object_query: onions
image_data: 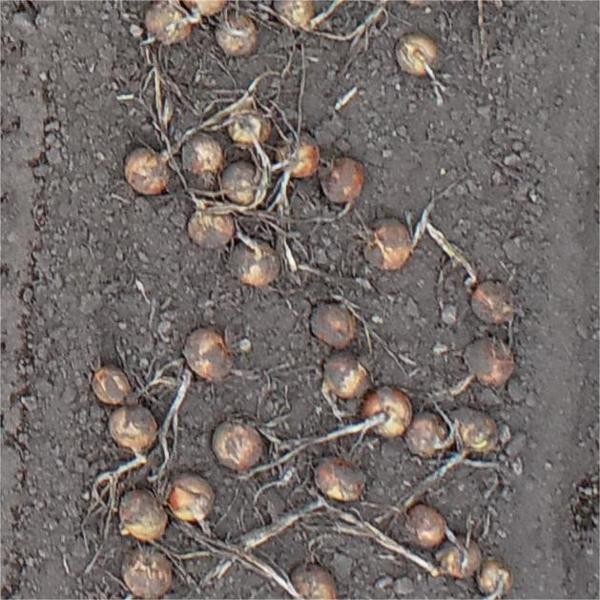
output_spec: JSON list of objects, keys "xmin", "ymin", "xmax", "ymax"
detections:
[
  {"xmin": 184, "ymin": 0, "xmax": 230, "ymax": 16},
  {"xmin": 230, "ymin": 238, "xmax": 278, "ymax": 284},
  {"xmin": 405, "ymin": 503, "xmax": 444, "ymax": 547},
  {"xmin": 211, "ymin": 421, "xmax": 264, "ymax": 471},
  {"xmin": 229, "ymin": 113, "xmax": 264, "ymax": 145},
  {"xmin": 309, "ymin": 301, "xmax": 360, "ymax": 347},
  {"xmin": 396, "ymin": 32, "xmax": 437, "ymax": 74},
  {"xmin": 314, "ymin": 456, "xmax": 362, "ymax": 502},
  {"xmin": 466, "ymin": 338, "xmax": 513, "ymax": 385},
  {"xmin": 458, "ymin": 410, "xmax": 496, "ymax": 451},
  {"xmin": 290, "ymin": 562, "xmax": 336, "ymax": 600},
  {"xmin": 470, "ymin": 279, "xmax": 513, "ymax": 324},
  {"xmin": 144, "ymin": 0, "xmax": 193, "ymax": 41},
  {"xmin": 217, "ymin": 15, "xmax": 255, "ymax": 55},
  {"xmin": 404, "ymin": 413, "xmax": 448, "ymax": 454},
  {"xmin": 184, "ymin": 133, "xmax": 225, "ymax": 178},
  {"xmin": 284, "ymin": 139, "xmax": 320, "ymax": 176},
  {"xmin": 364, "ymin": 216, "xmax": 409, "ymax": 269},
  {"xmin": 445, "ymin": 540, "xmax": 481, "ymax": 577},
  {"xmin": 122, "ymin": 148, "xmax": 166, "ymax": 193},
  {"xmin": 324, "ymin": 353, "xmax": 369, "ymax": 397},
  {"xmin": 181, "ymin": 330, "xmax": 231, "ymax": 380},
  {"xmin": 319, "ymin": 158, "xmax": 366, "ymax": 201},
  {"xmin": 119, "ymin": 489, "xmax": 166, "ymax": 538},
  {"xmin": 220, "ymin": 159, "xmax": 263, "ymax": 203},
  {"xmin": 121, "ymin": 550, "xmax": 173, "ymax": 596},
  {"xmin": 188, "ymin": 208, "xmax": 233, "ymax": 248},
  {"xmin": 280, "ymin": 0, "xmax": 315, "ymax": 31},
  {"xmin": 363, "ymin": 387, "xmax": 411, "ymax": 436},
  {"xmin": 479, "ymin": 564, "xmax": 510, "ymax": 594},
  {"xmin": 108, "ymin": 406, "xmax": 155, "ymax": 449},
  {"xmin": 91, "ymin": 366, "xmax": 132, "ymax": 405},
  {"xmin": 168, "ymin": 474, "xmax": 213, "ymax": 522}
]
